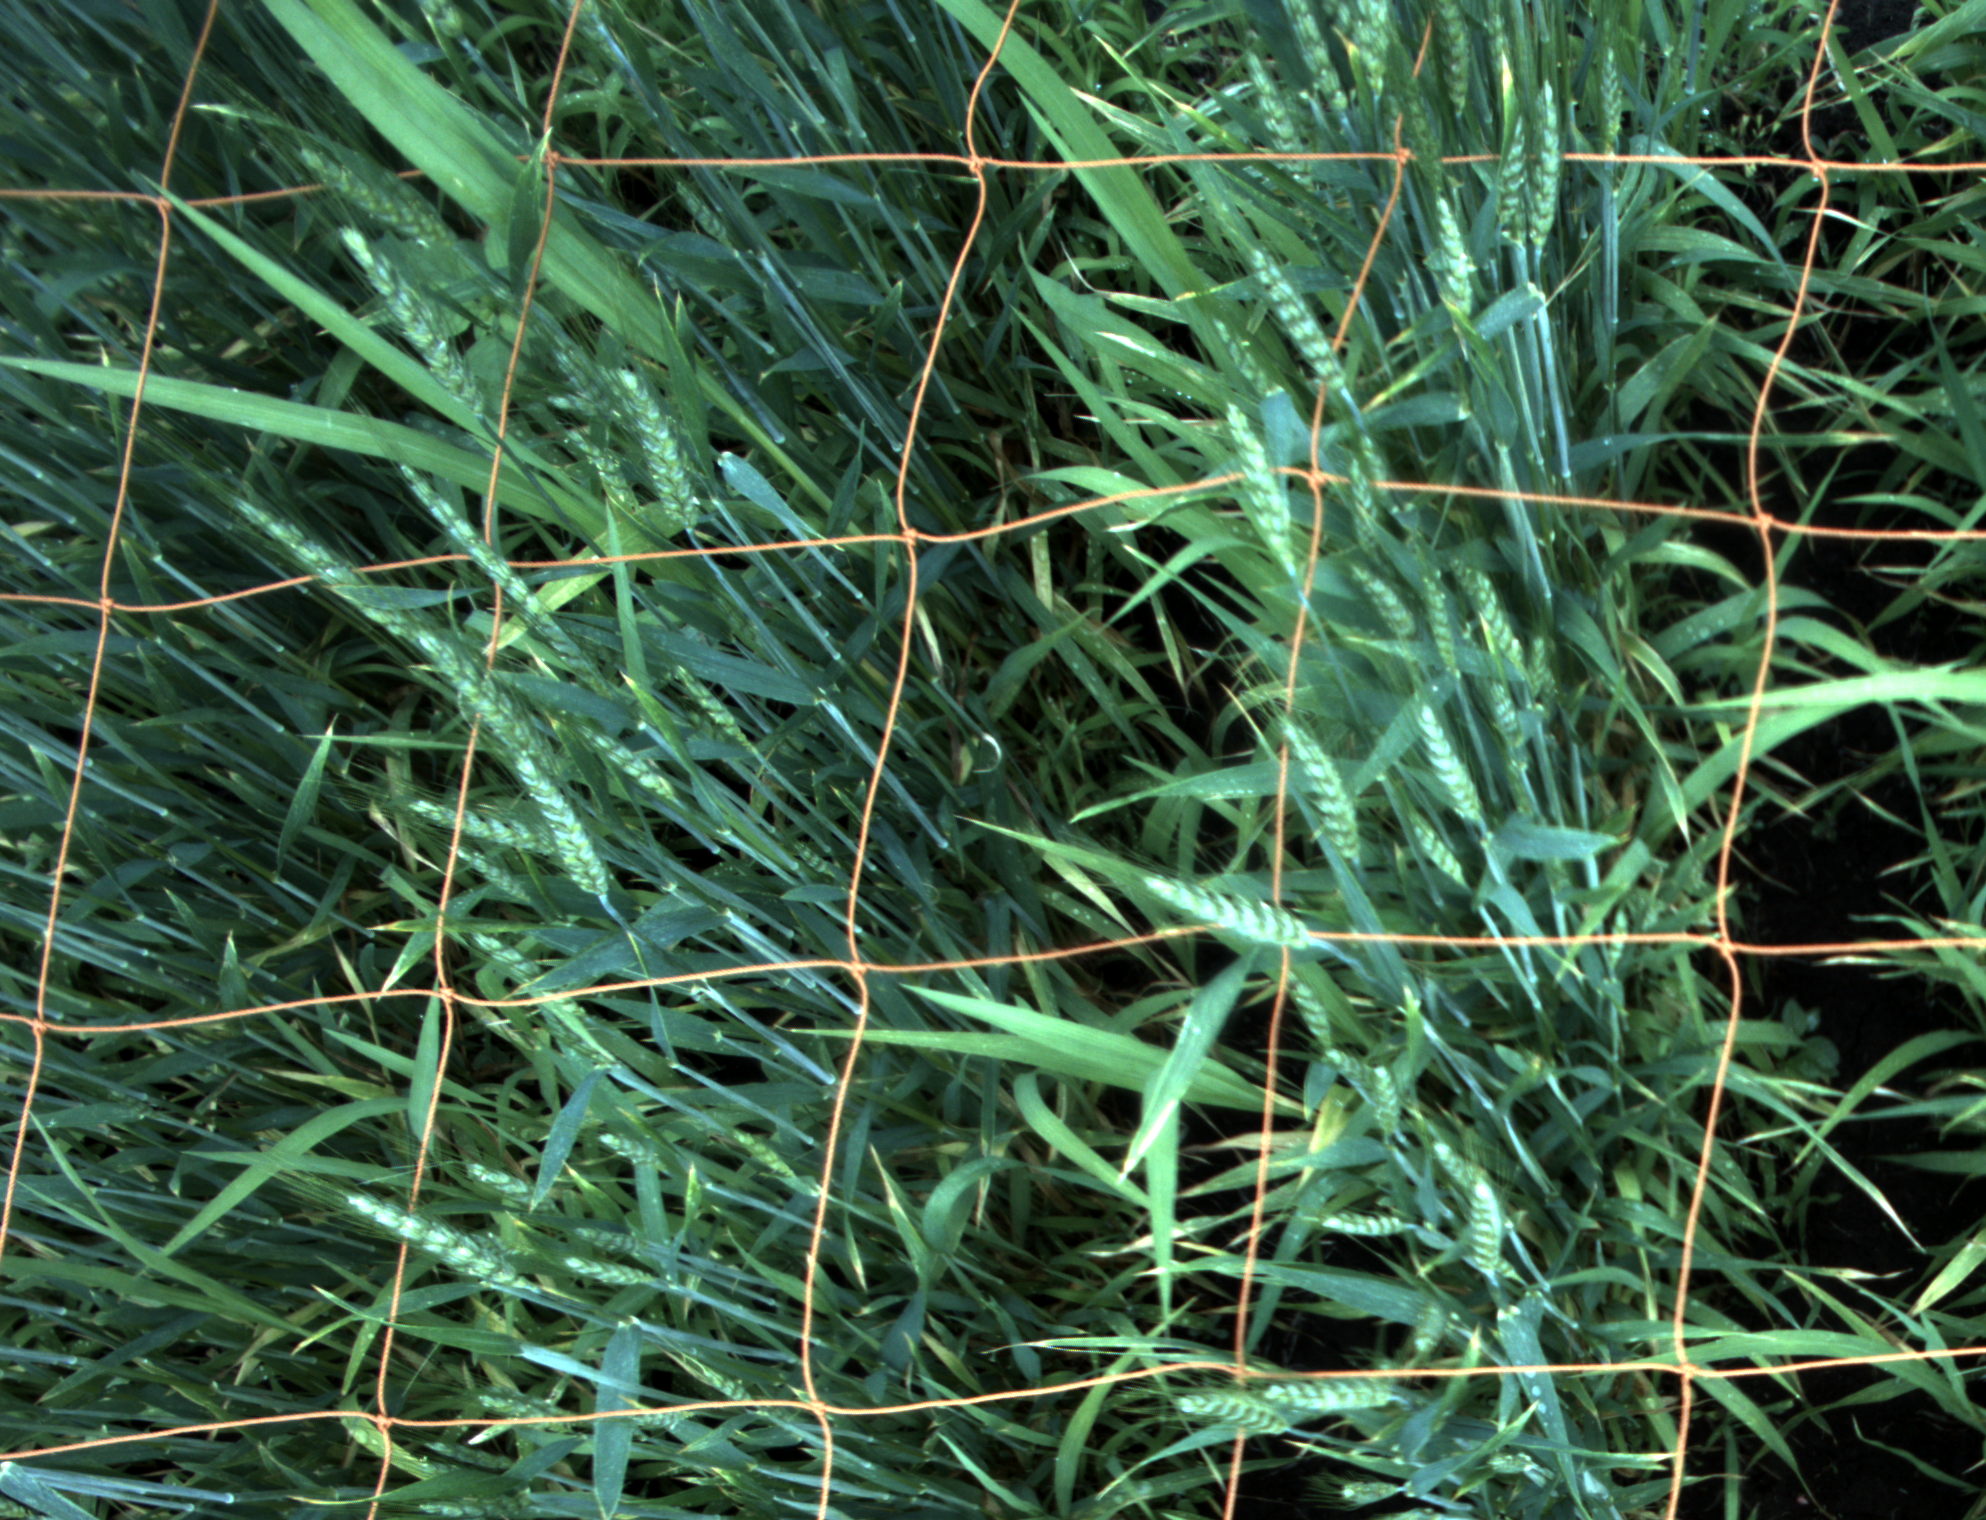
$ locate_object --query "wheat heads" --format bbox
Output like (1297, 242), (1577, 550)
(418, 1462), (461, 1476)
(1244, 46), (1317, 194)
(476, 1393), (575, 1434)
(1211, 316), (1277, 392)
(1513, 190), (1528, 237)
(630, 1407), (691, 1428)
(106, 1085), (159, 1121)
(614, 366), (699, 527)
(1469, 1177), (1502, 1272)
(299, 143), (456, 248)
(600, 445), (643, 514)
(1357, 431), (1389, 503)
(1449, 556), (1476, 598)
(1341, 1482), (1398, 1506)
(1494, 115), (1527, 223)
(448, 844), (532, 902)
(514, 752), (612, 895)
(467, 1233), (526, 1261)
(337, 223), (487, 413)
(416, 627), (567, 788)
(1399, 69), (1444, 192)
(554, 347), (628, 431)
(1407, 809), (1464, 883)
(1250, 246), (1347, 387)
(1318, 0), (1360, 41)
(1527, 1056), (1548, 1085)
(1348, 457), (1379, 554)
(1433, 196), (1473, 314)
(1541, 668), (1559, 712)
(1487, 1451), (1528, 1476)
(1488, 678), (1519, 734)
(674, 661), (751, 747)
(415, 0), (465, 36)
(566, 0), (628, 71)
(233, 495), (415, 640)
(1429, 1142), (1473, 1188)
(1471, 568), (1498, 604)
(470, 930), (586, 1015)
(1384, 95), (1402, 197)
(1285, 966), (1333, 1048)
(1224, 400), (1297, 572)
(676, 176), (730, 240)
(1175, 1392), (1291, 1435)
(1487, 1), (1514, 78)
(733, 1129), (796, 1177)
(417, 1493), (531, 1520)
(703, 1365), (755, 1408)
(1496, 1256), (1518, 1279)
(563, 1254), (656, 1288)
(469, 1161), (559, 1216)
(1320, 1047), (1378, 1090)
(1348, 562), (1416, 636)
(1598, 45), (1620, 142)
(571, 1225), (644, 1253)
(1263, 1379), (1395, 1411)
(686, 708), (728, 744)
(1371, 1507), (1422, 1520)
(0, 1493), (26, 1520)
(1278, 712), (1362, 861)
(1527, 77), (1558, 244)
(1528, 635), (1546, 699)
(1412, 1303), (1445, 1355)
(347, 1196), (529, 1289)
(405, 796), (556, 856)
(1419, 572), (1456, 675)
(795, 839), (832, 874)
(1674, 30), (1688, 76)
(424, 1435), (514, 1469)
(397, 462), (615, 699)
(597, 1129), (651, 1164)
(1507, 759), (1536, 816)
(1546, 854), (1572, 893)
(575, 721), (673, 798)
(1422, 704), (1483, 818)
(714, 591), (763, 648)
(1142, 874), (1312, 952)
(1431, 0), (1473, 114)
(1279, 1), (1349, 113)
(1474, 584), (1526, 680)
(1608, 910), (1630, 961)
(593, 362), (637, 423)
(1372, 1064), (1403, 1133)
(554, 1012), (612, 1066)
(1356, 0), (1391, 98)
(1318, 1212), (1404, 1239)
